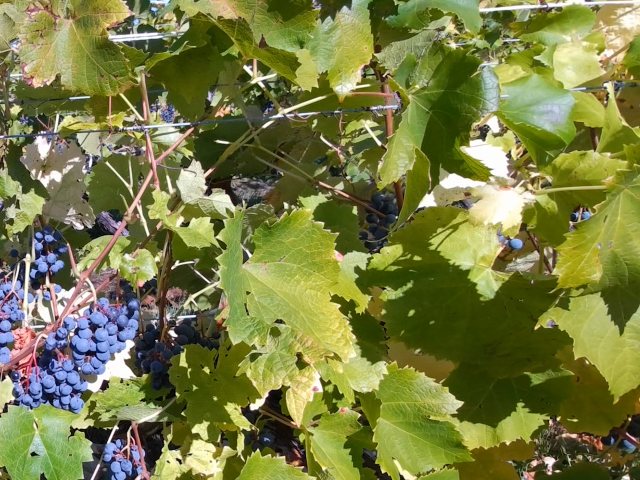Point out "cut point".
<instances>
[{
    "mask_svg": "<svg viewBox=\"0 0 640 480\" xmlns=\"http://www.w3.org/2000/svg\"><path fill=\"white\" fill-rule=\"evenodd\" d=\"M47 336H48L47 334H38V335L35 337V339H34V341H33V348L31 349V354H32V355H35V354H36V352H37V348H38V347H37V344L39 343V341H40L41 339H46V338H47Z\"/></svg>",
    "mask_w": 640,
    "mask_h": 480,
    "instance_id": "6a23745f",
    "label": "cut point"
},
{
    "mask_svg": "<svg viewBox=\"0 0 640 480\" xmlns=\"http://www.w3.org/2000/svg\"><path fill=\"white\" fill-rule=\"evenodd\" d=\"M26 261V255H23L20 259H18L14 265V271L12 273L13 277H17L19 274V267Z\"/></svg>",
    "mask_w": 640,
    "mask_h": 480,
    "instance_id": "7d7e1d6f",
    "label": "cut point"
},
{
    "mask_svg": "<svg viewBox=\"0 0 640 480\" xmlns=\"http://www.w3.org/2000/svg\"><path fill=\"white\" fill-rule=\"evenodd\" d=\"M85 283H86V286H87L88 291H89L93 296H96V295H97V293L95 292V289H96L95 284H94V283H92V281L90 280V278H89V277L87 278V280H86V282H85Z\"/></svg>",
    "mask_w": 640,
    "mask_h": 480,
    "instance_id": "deb38ca7",
    "label": "cut point"
}]
</instances>
